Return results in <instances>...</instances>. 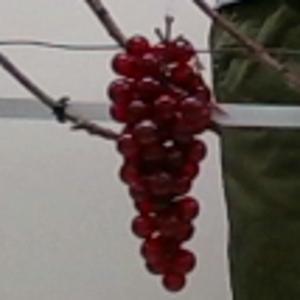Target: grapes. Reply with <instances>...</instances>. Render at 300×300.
<instances>
[{
  "label": "grapes",
  "instance_id": "1",
  "mask_svg": "<svg viewBox=\"0 0 300 300\" xmlns=\"http://www.w3.org/2000/svg\"><path fill=\"white\" fill-rule=\"evenodd\" d=\"M193 55L185 39L161 40L151 49L144 36H131L111 61L113 72L125 78L107 88L109 115L125 125L116 149L123 156L118 177L139 213L130 231L144 240L140 254L147 271L163 275L171 293L185 288V274L196 265L182 245L196 233L192 220L200 205L187 195L208 154L195 136L209 129L212 118V92L188 63Z\"/></svg>",
  "mask_w": 300,
  "mask_h": 300
}]
</instances>
